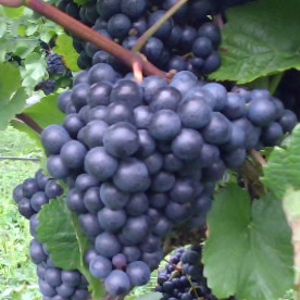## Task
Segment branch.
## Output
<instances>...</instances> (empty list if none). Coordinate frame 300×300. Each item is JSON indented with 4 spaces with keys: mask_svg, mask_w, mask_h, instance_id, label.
Here are the masks:
<instances>
[{
    "mask_svg": "<svg viewBox=\"0 0 300 300\" xmlns=\"http://www.w3.org/2000/svg\"><path fill=\"white\" fill-rule=\"evenodd\" d=\"M186 0H180L176 5H174L165 15H163L159 20H157L154 26L143 33L141 37L137 39V44L131 49L114 43L112 40L106 38L101 33L95 29L87 27L85 24L74 19V17L53 6L48 5L46 2L41 0H25V5L31 11L41 15L50 21L61 25L64 28L69 29L74 34L89 40L95 46L105 51L108 54L114 55L117 59H122L127 62L130 66L134 65V62H138L142 67L143 74L150 76L153 74L159 75L168 82L172 81V74L163 70L162 68L153 64L148 60L139 49L144 45L146 41L153 37L160 26L169 19L178 9H180Z\"/></svg>",
    "mask_w": 300,
    "mask_h": 300,
    "instance_id": "30e6481e",
    "label": "branch"
},
{
    "mask_svg": "<svg viewBox=\"0 0 300 300\" xmlns=\"http://www.w3.org/2000/svg\"><path fill=\"white\" fill-rule=\"evenodd\" d=\"M231 172L241 178L248 190L255 194L257 198L269 192V188L260 181L263 176L257 172L254 166L246 161V158L237 164L235 168H232Z\"/></svg>",
    "mask_w": 300,
    "mask_h": 300,
    "instance_id": "325d2c04",
    "label": "branch"
}]
</instances>
